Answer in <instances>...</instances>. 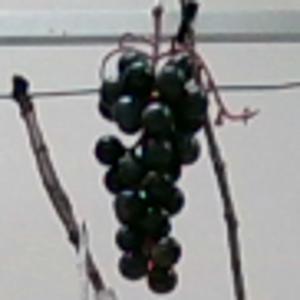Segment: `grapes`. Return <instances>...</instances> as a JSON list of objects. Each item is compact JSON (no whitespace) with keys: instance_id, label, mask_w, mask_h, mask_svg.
Instances as JSON below:
<instances>
[{"instance_id":"01657485","label":"grapes","mask_w":300,"mask_h":300,"mask_svg":"<svg viewBox=\"0 0 300 300\" xmlns=\"http://www.w3.org/2000/svg\"><path fill=\"white\" fill-rule=\"evenodd\" d=\"M118 76L108 74L99 83L100 116L118 122L127 136L144 127L140 154L124 146L115 134L99 136L93 146L106 191L116 196L112 209L123 225L115 235L124 250L117 263L119 274L131 282L145 279L147 289L160 296L171 294L178 281L176 268L183 255L173 235L174 220L185 207L187 193L178 185L182 165L202 156L195 137L209 121L210 100L199 83L185 85L198 73L192 53H165L153 63L139 49H126L117 58Z\"/></svg>"}]
</instances>
